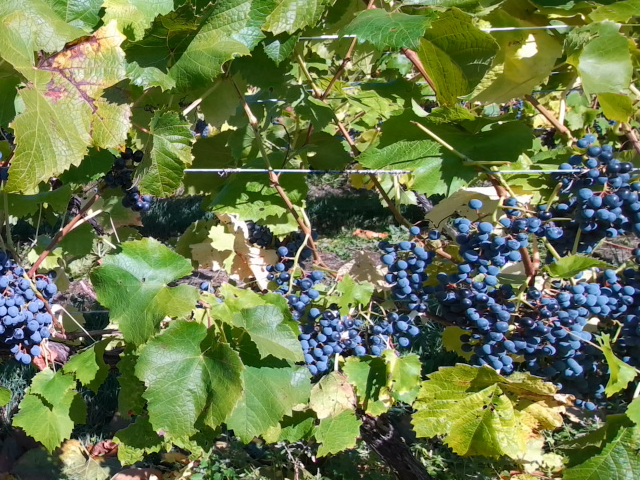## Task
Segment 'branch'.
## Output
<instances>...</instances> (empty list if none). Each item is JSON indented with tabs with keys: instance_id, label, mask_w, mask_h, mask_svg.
<instances>
[{
	"instance_id": "1d269e1b",
	"label": "branch",
	"mask_w": 640,
	"mask_h": 480,
	"mask_svg": "<svg viewBox=\"0 0 640 480\" xmlns=\"http://www.w3.org/2000/svg\"><path fill=\"white\" fill-rule=\"evenodd\" d=\"M336 127L338 128V130L340 131V134L344 140V142L348 145V147L350 148L352 154L354 156H358L360 154V151L358 150L356 144L353 142V140L350 138L346 127L344 126V124L342 122H338L336 124Z\"/></svg>"
},
{
	"instance_id": "982ccf7c",
	"label": "branch",
	"mask_w": 640,
	"mask_h": 480,
	"mask_svg": "<svg viewBox=\"0 0 640 480\" xmlns=\"http://www.w3.org/2000/svg\"><path fill=\"white\" fill-rule=\"evenodd\" d=\"M369 181L371 183V185L377 190V192L380 195V198L385 202V204L388 206L389 208V212L392 214L393 218L401 225L403 226L405 229H409L411 227V224L404 219L400 213L398 212V210L396 209L395 204L393 203V201L390 199V197L387 195L384 187L377 181L376 179V175L375 174H370L369 175Z\"/></svg>"
},
{
	"instance_id": "30e6481e",
	"label": "branch",
	"mask_w": 640,
	"mask_h": 480,
	"mask_svg": "<svg viewBox=\"0 0 640 480\" xmlns=\"http://www.w3.org/2000/svg\"><path fill=\"white\" fill-rule=\"evenodd\" d=\"M228 83L231 85V87L235 91V94L238 97V103L240 108L246 111L248 120L250 121V124L253 127V129L255 130L256 136L258 138V154L264 169H275L272 163V160L270 159V156L268 154V150L265 146L264 132L261 129V124L258 122L255 116V113L253 112V109L251 108V105L248 102L246 90L238 80L237 73L235 71H230L228 73Z\"/></svg>"
},
{
	"instance_id": "1ff4a987",
	"label": "branch",
	"mask_w": 640,
	"mask_h": 480,
	"mask_svg": "<svg viewBox=\"0 0 640 480\" xmlns=\"http://www.w3.org/2000/svg\"><path fill=\"white\" fill-rule=\"evenodd\" d=\"M405 55L410 60V62L414 65L418 76L422 80V82L427 86L430 91H435L437 89V84L435 80L430 76L427 72L426 67L420 57L416 54V51L412 48H407L405 50Z\"/></svg>"
},
{
	"instance_id": "325d2c04",
	"label": "branch",
	"mask_w": 640,
	"mask_h": 480,
	"mask_svg": "<svg viewBox=\"0 0 640 480\" xmlns=\"http://www.w3.org/2000/svg\"><path fill=\"white\" fill-rule=\"evenodd\" d=\"M272 188L274 189L275 193L277 194V197H282L287 205V207L289 208L291 214L293 215L295 221L298 223L299 229L301 231V233L303 234V237L305 234L309 235V239L306 242L307 243V247L309 249V252L311 254V259L316 263V264H322L324 262V257L320 254V249L316 243V239L312 233V230L310 229L305 217L303 215H301L299 213V211L297 210V208L294 206V204L292 203V201L290 200L288 193L286 192V190L284 189L283 185L281 184V180L278 176V174H267Z\"/></svg>"
},
{
	"instance_id": "45aa463d",
	"label": "branch",
	"mask_w": 640,
	"mask_h": 480,
	"mask_svg": "<svg viewBox=\"0 0 640 480\" xmlns=\"http://www.w3.org/2000/svg\"><path fill=\"white\" fill-rule=\"evenodd\" d=\"M97 202L96 198H91L86 205L83 207V209L81 210V212L75 216L74 218H72L71 220H69L65 226L62 228V230L60 231V233L58 234V236L56 237V239H54L53 241L49 242L46 244V246L44 247V249L41 251V254L39 256V258L37 259V261L32 265L30 271L28 272L29 276H33L34 273L36 272V269L42 264L46 254L49 252V249L51 247L56 246L61 239L64 237V235L66 234V232L69 230V228L76 222H78L79 220H81L86 213L88 212V210L90 209V207Z\"/></svg>"
},
{
	"instance_id": "ea751061",
	"label": "branch",
	"mask_w": 640,
	"mask_h": 480,
	"mask_svg": "<svg viewBox=\"0 0 640 480\" xmlns=\"http://www.w3.org/2000/svg\"><path fill=\"white\" fill-rule=\"evenodd\" d=\"M293 55L298 63V66L300 67V69L302 70L306 83L308 85L309 90L311 91V93L313 94V96L317 99L320 100L322 98L321 93L318 91V89L315 86V83L313 81L311 72L308 68V66L306 65L303 56L301 55V52L299 50H295L293 52Z\"/></svg>"
},
{
	"instance_id": "ca6c30ca",
	"label": "branch",
	"mask_w": 640,
	"mask_h": 480,
	"mask_svg": "<svg viewBox=\"0 0 640 480\" xmlns=\"http://www.w3.org/2000/svg\"><path fill=\"white\" fill-rule=\"evenodd\" d=\"M520 254L523 257V267L527 284L529 286H534L536 284V275L533 269L532 253L527 246H522L520 248Z\"/></svg>"
},
{
	"instance_id": "170604dd",
	"label": "branch",
	"mask_w": 640,
	"mask_h": 480,
	"mask_svg": "<svg viewBox=\"0 0 640 480\" xmlns=\"http://www.w3.org/2000/svg\"><path fill=\"white\" fill-rule=\"evenodd\" d=\"M528 102L544 117L551 129L563 143L571 141V133L567 126H561L549 108L542 103L535 94L528 96Z\"/></svg>"
},
{
	"instance_id": "1af6ec82",
	"label": "branch",
	"mask_w": 640,
	"mask_h": 480,
	"mask_svg": "<svg viewBox=\"0 0 640 480\" xmlns=\"http://www.w3.org/2000/svg\"><path fill=\"white\" fill-rule=\"evenodd\" d=\"M495 184V189L501 197H506L508 195V189L502 183L499 178V175H489Z\"/></svg>"
}]
</instances>
